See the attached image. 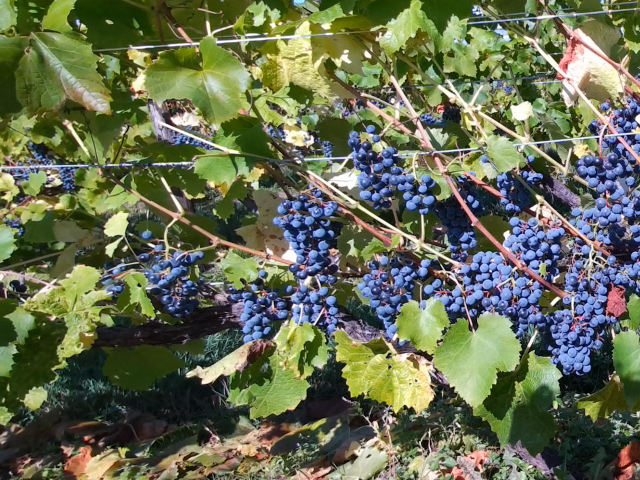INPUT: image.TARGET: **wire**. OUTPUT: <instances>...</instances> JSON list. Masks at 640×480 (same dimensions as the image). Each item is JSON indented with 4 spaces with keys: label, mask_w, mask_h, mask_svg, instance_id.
<instances>
[{
    "label": "wire",
    "mask_w": 640,
    "mask_h": 480,
    "mask_svg": "<svg viewBox=\"0 0 640 480\" xmlns=\"http://www.w3.org/2000/svg\"><path fill=\"white\" fill-rule=\"evenodd\" d=\"M483 150H484V146L480 145V146H469L465 148H441L436 150H425V151H418V152H396L395 156L396 157H420V156L438 155V154H444V153H468L471 151H483Z\"/></svg>",
    "instance_id": "a009ed1b"
},
{
    "label": "wire",
    "mask_w": 640,
    "mask_h": 480,
    "mask_svg": "<svg viewBox=\"0 0 640 480\" xmlns=\"http://www.w3.org/2000/svg\"><path fill=\"white\" fill-rule=\"evenodd\" d=\"M385 28L376 29H347L333 33H313V34H299V35H281V36H261V37H247V38H231V39H217V44H233V43H249V42H263V41H283V40H301V39H316V38H335L349 34H378L384 33Z\"/></svg>",
    "instance_id": "a73af890"
},
{
    "label": "wire",
    "mask_w": 640,
    "mask_h": 480,
    "mask_svg": "<svg viewBox=\"0 0 640 480\" xmlns=\"http://www.w3.org/2000/svg\"><path fill=\"white\" fill-rule=\"evenodd\" d=\"M335 160H352L351 155H332V156H322L315 158H304V157H288V162H301V163H318L324 161H335Z\"/></svg>",
    "instance_id": "f1345edc"
},
{
    "label": "wire",
    "mask_w": 640,
    "mask_h": 480,
    "mask_svg": "<svg viewBox=\"0 0 640 480\" xmlns=\"http://www.w3.org/2000/svg\"><path fill=\"white\" fill-rule=\"evenodd\" d=\"M134 167L135 163L130 161L118 162V163H100V162H86L81 164H46V165H1V170H13V171H25V170H48V169H83L88 167L98 168H121V167Z\"/></svg>",
    "instance_id": "4f2155b8"
},
{
    "label": "wire",
    "mask_w": 640,
    "mask_h": 480,
    "mask_svg": "<svg viewBox=\"0 0 640 480\" xmlns=\"http://www.w3.org/2000/svg\"><path fill=\"white\" fill-rule=\"evenodd\" d=\"M597 135H582V136H574V137H566L559 139H545L540 141H526V146H543L547 144H561L568 142H576V141H584V140H597Z\"/></svg>",
    "instance_id": "34cfc8c6"
},
{
    "label": "wire",
    "mask_w": 640,
    "mask_h": 480,
    "mask_svg": "<svg viewBox=\"0 0 640 480\" xmlns=\"http://www.w3.org/2000/svg\"><path fill=\"white\" fill-rule=\"evenodd\" d=\"M630 12H640V7H628V8H620V9H612L608 11H588L584 10L581 12H571V13H551L545 14L541 16H530V17H508L497 20H475L468 21V26H477V25H499L510 22H532V21H543L547 19L553 18H573V17H584V16H610L614 14H622V13H630Z\"/></svg>",
    "instance_id": "d2f4af69"
},
{
    "label": "wire",
    "mask_w": 640,
    "mask_h": 480,
    "mask_svg": "<svg viewBox=\"0 0 640 480\" xmlns=\"http://www.w3.org/2000/svg\"><path fill=\"white\" fill-rule=\"evenodd\" d=\"M200 41H189V42H170V43H153L148 45H133L125 48H116V47H105L102 49H93V54H104L107 52L114 53H127L135 50H150L155 48H172V47H191V46H200Z\"/></svg>",
    "instance_id": "f0478fcc"
}]
</instances>
